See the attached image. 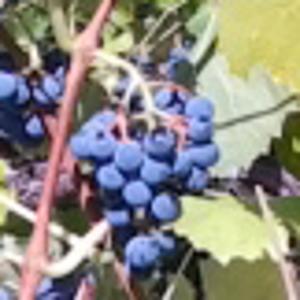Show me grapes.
Returning a JSON list of instances; mask_svg holds the SVG:
<instances>
[{
  "mask_svg": "<svg viewBox=\"0 0 300 300\" xmlns=\"http://www.w3.org/2000/svg\"><path fill=\"white\" fill-rule=\"evenodd\" d=\"M122 82L105 105L67 140L79 162L99 167L104 200L101 217L114 229L122 258L145 272L160 255L174 250L160 223L181 217V198L200 195L220 158L215 141L214 102L169 84Z\"/></svg>",
  "mask_w": 300,
  "mask_h": 300,
  "instance_id": "obj_1",
  "label": "grapes"
},
{
  "mask_svg": "<svg viewBox=\"0 0 300 300\" xmlns=\"http://www.w3.org/2000/svg\"><path fill=\"white\" fill-rule=\"evenodd\" d=\"M47 76L30 82L14 68L0 66V135L34 145L46 136L41 109L55 111L61 105L64 85L70 71L69 58L60 50H50L43 57Z\"/></svg>",
  "mask_w": 300,
  "mask_h": 300,
  "instance_id": "obj_2",
  "label": "grapes"
}]
</instances>
